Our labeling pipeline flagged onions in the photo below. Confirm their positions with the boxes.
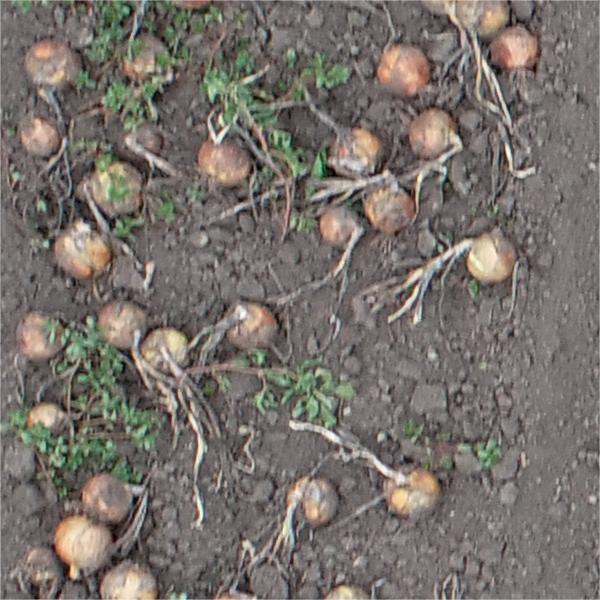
[135,124,165,156]
[457,0,506,38]
[229,301,274,349]
[53,223,111,276]
[490,26,538,69]
[25,400,67,437]
[406,109,455,158]
[331,126,382,175]
[89,162,140,215]
[377,44,430,95]
[16,313,59,358]
[291,477,335,525]
[54,513,114,570]
[363,180,412,232]
[403,468,440,496]
[388,468,439,515]
[199,139,250,187]
[326,583,364,599]
[100,561,159,599]
[82,474,129,523]
[18,116,59,156]
[466,230,514,282]
[317,206,361,248]
[137,326,188,367]
[121,42,164,83]
[19,548,63,593]
[23,39,81,91]
[98,299,147,348]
